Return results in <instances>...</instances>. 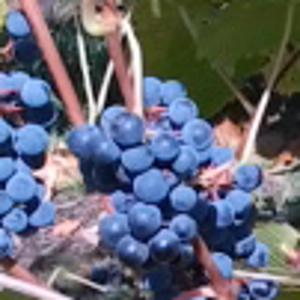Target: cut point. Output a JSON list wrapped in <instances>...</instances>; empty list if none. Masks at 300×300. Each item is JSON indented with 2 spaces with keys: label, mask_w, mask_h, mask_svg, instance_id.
<instances>
[{
  "label": "cut point",
  "mask_w": 300,
  "mask_h": 300,
  "mask_svg": "<svg viewBox=\"0 0 300 300\" xmlns=\"http://www.w3.org/2000/svg\"><path fill=\"white\" fill-rule=\"evenodd\" d=\"M119 31L122 32L127 40L129 41L131 52H132V61H133V91H132V100L135 105L134 111L136 113H142L144 108L143 98L141 96L142 90V77H143V64L141 57V47L139 39L134 32V30L126 23L120 21Z\"/></svg>",
  "instance_id": "1"
}]
</instances>
